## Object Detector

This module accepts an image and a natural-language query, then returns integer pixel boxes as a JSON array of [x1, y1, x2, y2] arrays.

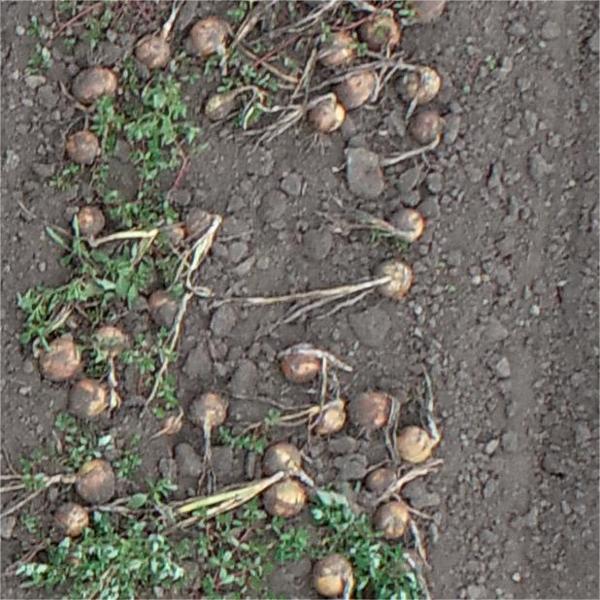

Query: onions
[[376, 259, 412, 298], [185, 17, 227, 57], [163, 417, 181, 435], [350, 390, 392, 431], [263, 441, 301, 477], [41, 333, 80, 381], [266, 480, 306, 518], [68, 378, 112, 417], [282, 343, 326, 385], [372, 500, 409, 538], [74, 460, 113, 501], [71, 203, 103, 233], [64, 130, 98, 164], [410, 0, 443, 21], [390, 208, 422, 239], [363, 13, 398, 51], [161, 225, 187, 247], [322, 28, 355, 68], [310, 553, 351, 593], [135, 35, 169, 70], [395, 426, 432, 462], [310, 398, 344, 433], [410, 106, 443, 143], [144, 289, 179, 325], [363, 462, 397, 492], [204, 90, 240, 120], [305, 96, 340, 133], [336, 68, 374, 107], [186, 392, 228, 428], [92, 329, 125, 360], [184, 208, 211, 231], [401, 66, 439, 102], [53, 502, 89, 538], [71, 66, 114, 104]]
